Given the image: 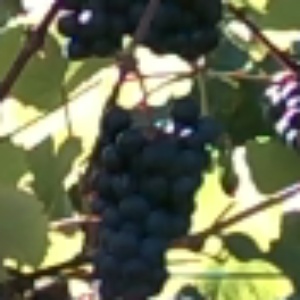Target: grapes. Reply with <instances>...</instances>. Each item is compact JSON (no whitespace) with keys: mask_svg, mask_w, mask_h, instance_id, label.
Here are the masks:
<instances>
[{"mask_svg":"<svg viewBox=\"0 0 300 300\" xmlns=\"http://www.w3.org/2000/svg\"><path fill=\"white\" fill-rule=\"evenodd\" d=\"M190 97L150 112L108 109L100 150L81 191L100 217L93 263L107 300H146L164 287L163 252L189 229L191 197L206 162L201 148L219 134Z\"/></svg>","mask_w":300,"mask_h":300,"instance_id":"1","label":"grapes"},{"mask_svg":"<svg viewBox=\"0 0 300 300\" xmlns=\"http://www.w3.org/2000/svg\"><path fill=\"white\" fill-rule=\"evenodd\" d=\"M150 0H59L67 12L57 20L59 31L72 35L69 57L82 61L93 53L107 58L122 44L120 33H130Z\"/></svg>","mask_w":300,"mask_h":300,"instance_id":"2","label":"grapes"},{"mask_svg":"<svg viewBox=\"0 0 300 300\" xmlns=\"http://www.w3.org/2000/svg\"><path fill=\"white\" fill-rule=\"evenodd\" d=\"M222 13L219 0H165L148 45L156 53L176 51L180 57L194 60L217 44L219 33L213 26Z\"/></svg>","mask_w":300,"mask_h":300,"instance_id":"3","label":"grapes"}]
</instances>
